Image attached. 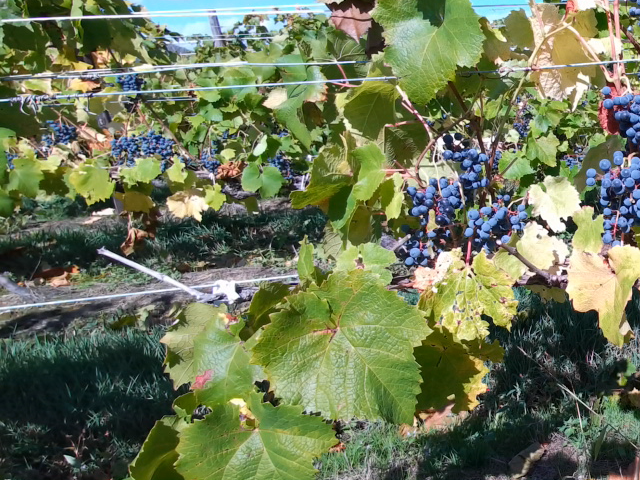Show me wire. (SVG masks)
<instances>
[{
	"label": "wire",
	"instance_id": "a009ed1b",
	"mask_svg": "<svg viewBox=\"0 0 640 480\" xmlns=\"http://www.w3.org/2000/svg\"><path fill=\"white\" fill-rule=\"evenodd\" d=\"M179 290H180L179 286H172V287L164 288L161 290H145L141 292L94 294V295L82 296L79 298H73V299H63V300L54 301V302H31V303L16 304L11 306H0V311H13L18 309L33 308V307H56V306H62L65 304H75V303H81L89 300H96V299L143 297L147 295H163V294H167V293L179 291Z\"/></svg>",
	"mask_w": 640,
	"mask_h": 480
},
{
	"label": "wire",
	"instance_id": "a73af890",
	"mask_svg": "<svg viewBox=\"0 0 640 480\" xmlns=\"http://www.w3.org/2000/svg\"><path fill=\"white\" fill-rule=\"evenodd\" d=\"M396 75H378L376 77H353L343 79H326V80H307L302 82H271L254 85H208L204 87H165L154 89H139L124 92H72V93H53L45 95H37L23 98H0L1 103H25L39 100L55 99V98H74V97H126L141 94H156L167 92H206L210 90H256L273 87H304L309 85H328V84H345L355 82H378L381 80H396Z\"/></svg>",
	"mask_w": 640,
	"mask_h": 480
},
{
	"label": "wire",
	"instance_id": "4f2155b8",
	"mask_svg": "<svg viewBox=\"0 0 640 480\" xmlns=\"http://www.w3.org/2000/svg\"><path fill=\"white\" fill-rule=\"evenodd\" d=\"M369 58H360L352 60H325L317 62H212V63H195V64H180L169 66H156L151 68H133L115 70L110 72L100 73H87V74H44L37 76L26 77H1V82H28L39 81L46 79H89V78H102L112 77L117 75L135 74V73H153L158 71H171L182 69H197V68H214V67H319L327 65H354L369 63Z\"/></svg>",
	"mask_w": 640,
	"mask_h": 480
},
{
	"label": "wire",
	"instance_id": "d2f4af69",
	"mask_svg": "<svg viewBox=\"0 0 640 480\" xmlns=\"http://www.w3.org/2000/svg\"><path fill=\"white\" fill-rule=\"evenodd\" d=\"M325 4L277 3L250 6H221L207 8H155L124 14H93L87 16H42L36 18H2V23H38L44 21H89L95 19L126 18H195L217 17H262L301 13H330Z\"/></svg>",
	"mask_w": 640,
	"mask_h": 480
},
{
	"label": "wire",
	"instance_id": "f0478fcc",
	"mask_svg": "<svg viewBox=\"0 0 640 480\" xmlns=\"http://www.w3.org/2000/svg\"><path fill=\"white\" fill-rule=\"evenodd\" d=\"M639 58L634 59H618V60H610V61H585V62H574V63H564L563 65H524L510 68H500V69H480V70H472V71H456V76H474V75H482V74H503V73H512L526 70H566L567 68H576V67H587V66H612V65H621V64H636L639 63Z\"/></svg>",
	"mask_w": 640,
	"mask_h": 480
},
{
	"label": "wire",
	"instance_id": "34cfc8c6",
	"mask_svg": "<svg viewBox=\"0 0 640 480\" xmlns=\"http://www.w3.org/2000/svg\"><path fill=\"white\" fill-rule=\"evenodd\" d=\"M299 278H300L299 274L280 275V276H267V277H260V278L238 279L237 283L238 284L262 283V282H269V281L296 280V279H299Z\"/></svg>",
	"mask_w": 640,
	"mask_h": 480
}]
</instances>
